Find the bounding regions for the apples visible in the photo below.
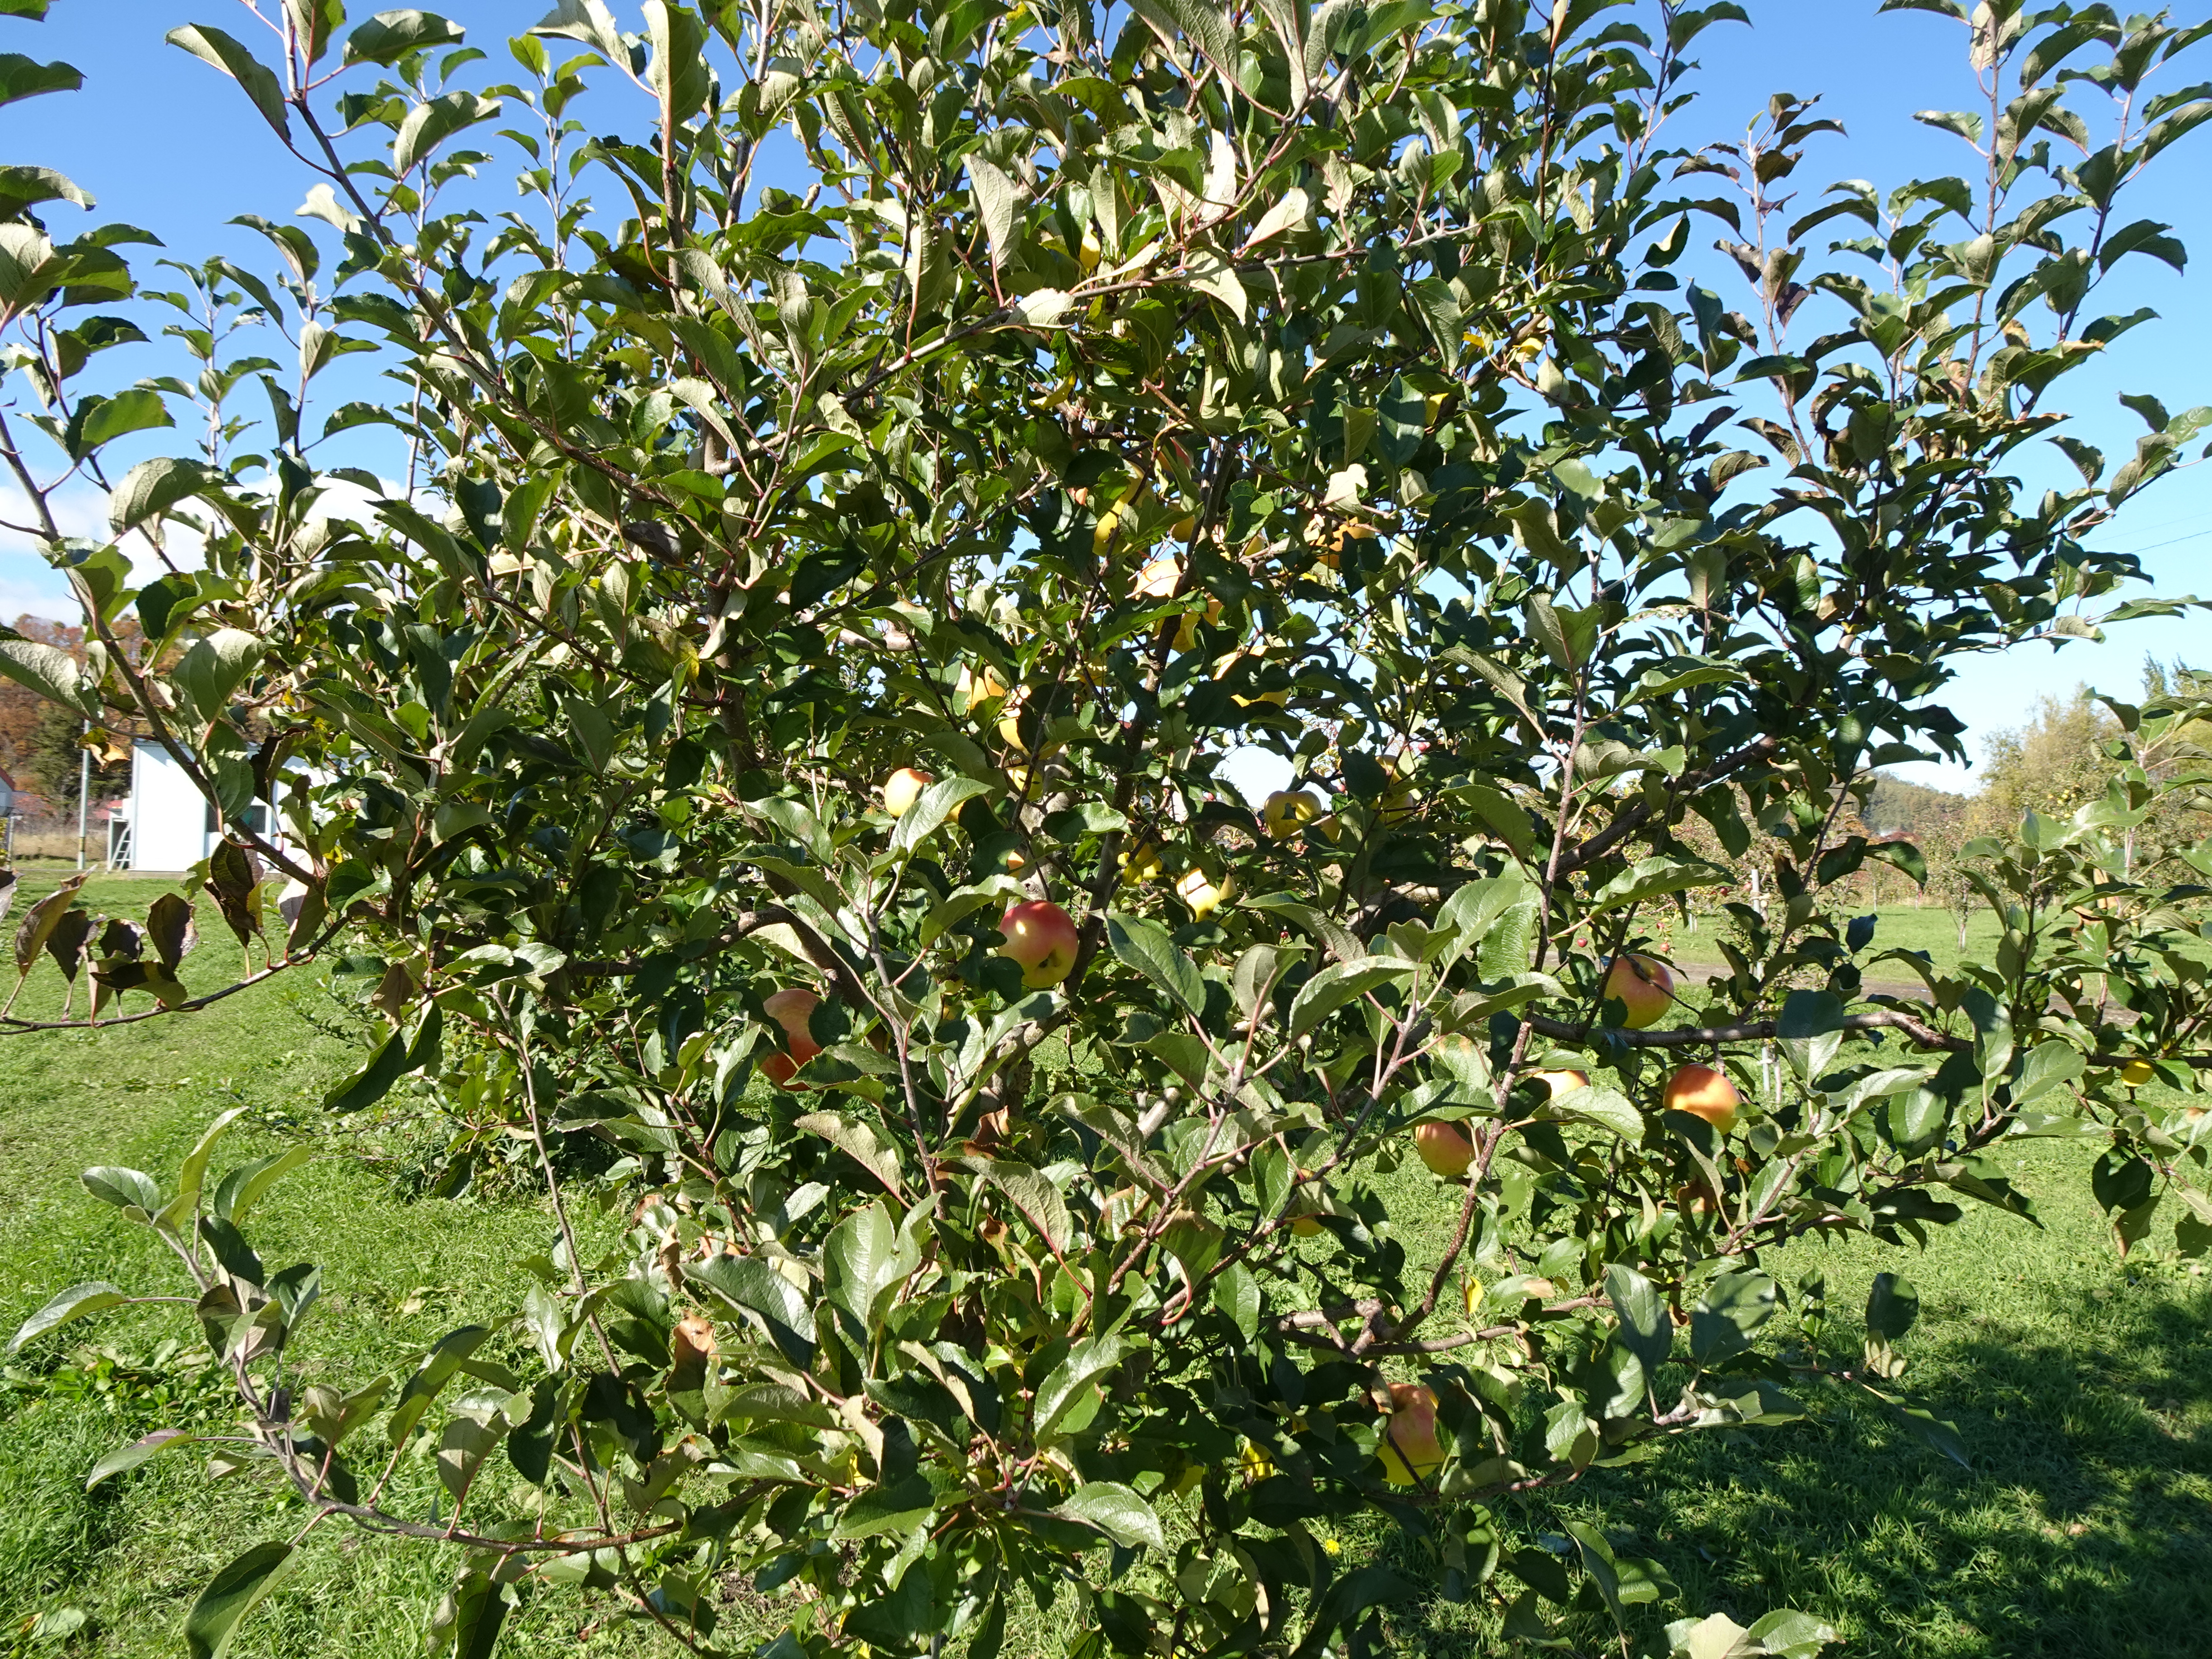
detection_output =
[1166,499,1195,544]
[1319,816,1341,843]
[1156,438,1190,473]
[1245,534,1265,556]
[1170,627,1195,653]
[955,659,1006,710]
[1369,792,1413,829]
[1604,954,1674,1028]
[1368,755,1409,805]
[1003,759,1043,799]
[1067,460,1155,543]
[1415,1119,1484,1176]
[1293,1168,1331,1237]
[1358,1383,1446,1486]
[1212,644,1289,708]
[1264,791,1321,840]
[1531,1069,1591,1100]
[1176,867,1238,927]
[1309,517,1375,568]
[759,988,828,1091]
[1132,559,1205,626]
[1663,1063,1742,1136]
[1185,595,1224,648]
[884,768,932,817]
[1022,741,1067,759]
[943,800,965,824]
[1007,852,1025,878]
[1419,1385,1439,1409]
[998,900,1078,988]
[999,684,1031,751]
